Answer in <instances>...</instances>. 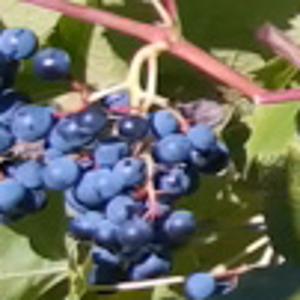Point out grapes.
<instances>
[{
    "instance_id": "obj_1",
    "label": "grapes",
    "mask_w": 300,
    "mask_h": 300,
    "mask_svg": "<svg viewBox=\"0 0 300 300\" xmlns=\"http://www.w3.org/2000/svg\"><path fill=\"white\" fill-rule=\"evenodd\" d=\"M39 47L25 27L0 31V216L17 220L62 192L73 215L68 233L95 239L87 280L112 285L166 275V248L196 228L191 209L172 200L195 194L200 173L214 176L230 163L215 130L190 122L178 109L150 102L128 109L129 96L104 97L80 113L57 117L22 91L11 90L21 61L42 83H65L73 61L64 50Z\"/></svg>"
},
{
    "instance_id": "obj_2",
    "label": "grapes",
    "mask_w": 300,
    "mask_h": 300,
    "mask_svg": "<svg viewBox=\"0 0 300 300\" xmlns=\"http://www.w3.org/2000/svg\"><path fill=\"white\" fill-rule=\"evenodd\" d=\"M217 285V277L206 270L192 272L183 280V290L190 300H211Z\"/></svg>"
}]
</instances>
